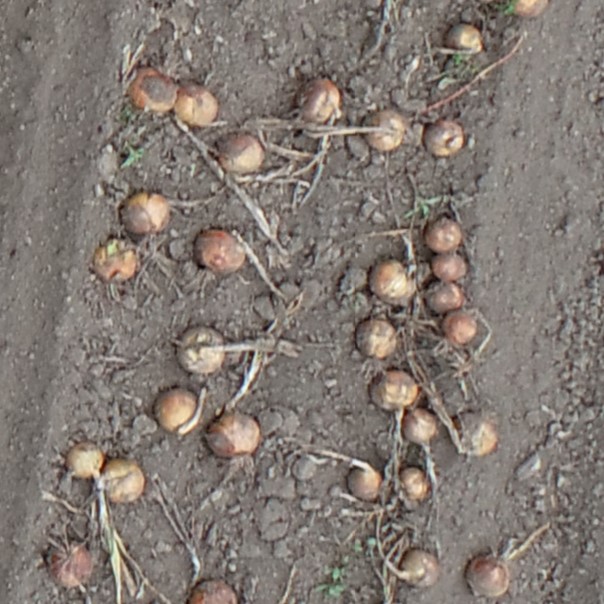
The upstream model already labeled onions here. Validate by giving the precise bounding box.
[356,319,397,359]
[65,444,103,479]
[92,237,136,280]
[186,580,237,604]
[100,459,143,501]
[130,70,175,113]
[402,408,439,443]
[428,280,462,311]
[465,554,508,595]
[424,218,461,251]
[296,80,341,125]
[205,410,259,458]
[46,542,92,586]
[445,22,481,53]
[368,110,403,152]
[370,260,413,300]
[373,372,418,410]
[153,388,198,433]
[121,191,170,236]
[173,86,217,126]
[177,327,224,376]
[442,312,476,345]
[193,227,244,276]
[455,414,493,456]
[397,468,428,500]
[507,0,547,22]
[217,132,262,173]
[345,462,379,499]
[431,252,463,281]
[423,118,462,156]
[399,547,438,585]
